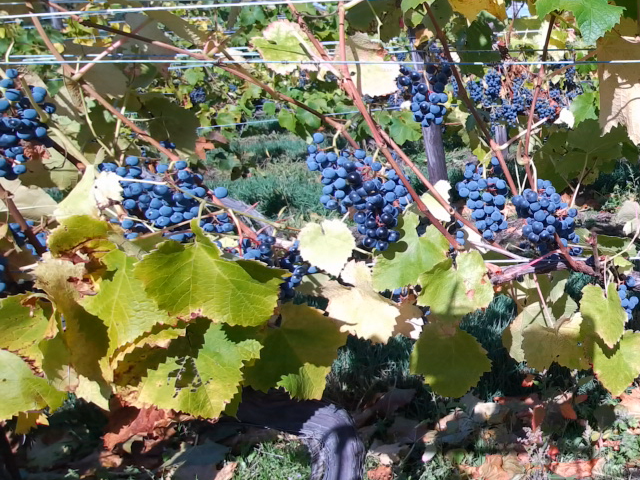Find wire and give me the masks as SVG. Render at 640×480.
Here are the masks:
<instances>
[{"label": "wire", "mask_w": 640, "mask_h": 480, "mask_svg": "<svg viewBox=\"0 0 640 480\" xmlns=\"http://www.w3.org/2000/svg\"><path fill=\"white\" fill-rule=\"evenodd\" d=\"M351 0H293V1H255L236 3H206V4H184L179 6H153L129 9H101L96 11H76V12H32L17 13L13 15H0V20H16L19 18L34 17H78V16H108L110 14H132L155 11H181L186 9H206V8H239L257 6H295L311 3L327 4H349Z\"/></svg>", "instance_id": "2"}, {"label": "wire", "mask_w": 640, "mask_h": 480, "mask_svg": "<svg viewBox=\"0 0 640 480\" xmlns=\"http://www.w3.org/2000/svg\"><path fill=\"white\" fill-rule=\"evenodd\" d=\"M148 63H170V64H191L200 66H220V65H261L274 66L282 64L292 65H318V64H336L345 66H365V65H394V66H432V65H464L468 67H490V66H550V65H566V66H602L614 64H640V59H612L600 61H568V60H548V61H488V62H470L466 60L446 59V60H430V61H396V60H362L347 61L338 59H316V60H250V59H232L218 61H203L193 59H172V58H145L143 59H111V60H94V59H74V60H33V61H4L0 60L1 66H55V65H114V64H141Z\"/></svg>", "instance_id": "1"}]
</instances>
